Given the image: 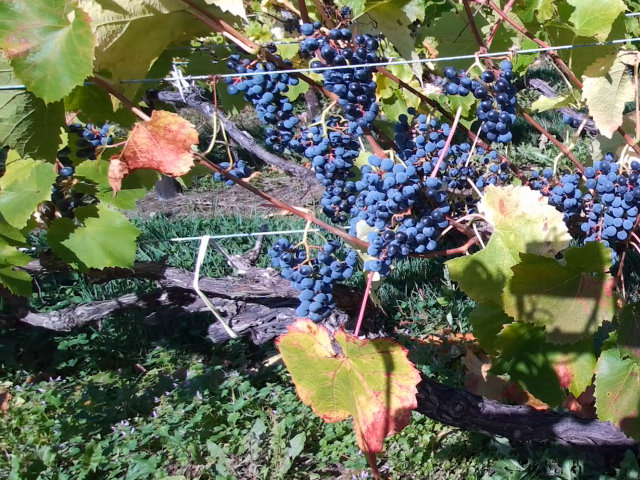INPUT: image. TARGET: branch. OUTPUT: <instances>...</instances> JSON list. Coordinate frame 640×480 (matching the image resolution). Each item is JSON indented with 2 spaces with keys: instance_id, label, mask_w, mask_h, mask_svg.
<instances>
[{
  "instance_id": "obj_1",
  "label": "branch",
  "mask_w": 640,
  "mask_h": 480,
  "mask_svg": "<svg viewBox=\"0 0 640 480\" xmlns=\"http://www.w3.org/2000/svg\"><path fill=\"white\" fill-rule=\"evenodd\" d=\"M191 155L198 161L203 162L204 164L212 167L216 172H222L227 178L233 179L235 181V185H237L239 188L243 189L244 191L256 197H259L260 199H263L267 202H270L274 204L276 207L281 208L285 211H288L289 213H292L307 222L315 223L317 226L327 228L331 234H333L335 237H338L346 241L347 243L358 245L362 248H368L370 246V243L368 241L362 240L361 238L350 236L342 232L341 230L336 229L328 221L319 219L317 216H312L310 214H307L305 211L300 210L295 206H292L288 203L280 201L278 198L270 194H267L266 192L258 190L253 186H250L249 184L245 183L241 179L231 175L229 172L223 169L215 160H212L211 158H208L207 156L200 154L196 149H193L191 151Z\"/></svg>"
},
{
  "instance_id": "obj_2",
  "label": "branch",
  "mask_w": 640,
  "mask_h": 480,
  "mask_svg": "<svg viewBox=\"0 0 640 480\" xmlns=\"http://www.w3.org/2000/svg\"><path fill=\"white\" fill-rule=\"evenodd\" d=\"M187 5L192 10H194L195 12H197V13L201 14L202 16H204L208 21H210L212 23H215L216 25H218L222 29L226 30L229 34H231L234 38L239 40L241 43L247 45L248 47L253 49L255 52H257L258 54L263 56L268 62L273 64L278 69H280V70H288L289 69V66L286 63H283L280 60H278L277 58H275L274 56H272L263 47L259 46L258 44H256L251 39H249V38L245 37L243 34L239 33L230 24H228L227 22H225L221 18H219L217 16H214L213 14H211L204 7L197 5L193 0H188L187 1Z\"/></svg>"
},
{
  "instance_id": "obj_3",
  "label": "branch",
  "mask_w": 640,
  "mask_h": 480,
  "mask_svg": "<svg viewBox=\"0 0 640 480\" xmlns=\"http://www.w3.org/2000/svg\"><path fill=\"white\" fill-rule=\"evenodd\" d=\"M378 71L381 75L389 77L390 79H392L394 82L398 83L403 89L413 92L416 95H418L420 98H422L423 100L426 101V103L428 105H430L431 107L437 109L442 115H444L446 118H449L451 121L455 120V116L440 102H437L436 100H434L432 97L424 94L422 91H420L419 89L409 86L407 85L402 79L398 78L396 75H394L392 72L389 71H385L383 68H378Z\"/></svg>"
},
{
  "instance_id": "obj_4",
  "label": "branch",
  "mask_w": 640,
  "mask_h": 480,
  "mask_svg": "<svg viewBox=\"0 0 640 480\" xmlns=\"http://www.w3.org/2000/svg\"><path fill=\"white\" fill-rule=\"evenodd\" d=\"M515 109L518 111L523 118H525L534 128H536L539 132H541L546 138L550 139L565 155L580 169H584V165L579 162V160L561 143L555 138L552 134H550L547 130H545L540 124H538L533 118L528 115L520 105H516Z\"/></svg>"
},
{
  "instance_id": "obj_5",
  "label": "branch",
  "mask_w": 640,
  "mask_h": 480,
  "mask_svg": "<svg viewBox=\"0 0 640 480\" xmlns=\"http://www.w3.org/2000/svg\"><path fill=\"white\" fill-rule=\"evenodd\" d=\"M93 81L102 86L110 95L119 99L130 111H132L135 115L141 118L143 121H147L149 116L137 108L124 94L114 89L105 79L100 78L99 76H95Z\"/></svg>"
},
{
  "instance_id": "obj_6",
  "label": "branch",
  "mask_w": 640,
  "mask_h": 480,
  "mask_svg": "<svg viewBox=\"0 0 640 480\" xmlns=\"http://www.w3.org/2000/svg\"><path fill=\"white\" fill-rule=\"evenodd\" d=\"M478 243V238L470 235L469 236V241L466 242L463 246L458 247V248H452V249H448L445 251H432L429 253H424V254H418V253H409L408 257L409 258H416V259H433L434 257L437 256H448L450 254H455V253H460L463 251H466L470 246H472L473 244H477Z\"/></svg>"
},
{
  "instance_id": "obj_7",
  "label": "branch",
  "mask_w": 640,
  "mask_h": 480,
  "mask_svg": "<svg viewBox=\"0 0 640 480\" xmlns=\"http://www.w3.org/2000/svg\"><path fill=\"white\" fill-rule=\"evenodd\" d=\"M488 5L495 10V12L503 19L505 20L508 24H510L513 28H515L518 32L522 33L523 35H525L526 37L530 38L531 40H533L535 43L539 44L541 47L543 46H549L548 44H546L543 40L539 39L536 35H533L531 32L527 31L526 29L522 28L520 25H518L514 20H512L509 16H507L506 14H504V12L500 9L499 6H497L493 0H488Z\"/></svg>"
},
{
  "instance_id": "obj_8",
  "label": "branch",
  "mask_w": 640,
  "mask_h": 480,
  "mask_svg": "<svg viewBox=\"0 0 640 480\" xmlns=\"http://www.w3.org/2000/svg\"><path fill=\"white\" fill-rule=\"evenodd\" d=\"M297 77L303 82L307 83L313 90L318 92L322 97L328 98L333 102H337L339 100V97L336 94H334L331 91L325 90L322 86H320L318 83H316L312 78H310L306 74L298 73Z\"/></svg>"
},
{
  "instance_id": "obj_9",
  "label": "branch",
  "mask_w": 640,
  "mask_h": 480,
  "mask_svg": "<svg viewBox=\"0 0 640 480\" xmlns=\"http://www.w3.org/2000/svg\"><path fill=\"white\" fill-rule=\"evenodd\" d=\"M464 8H465V12L466 15L469 17L472 27H473V32H474V36H475V41L477 43V46L479 48V50L483 53H489V49L485 48L481 38H480V34H479V30H478V24L477 21L475 19V16L473 15V13L471 12L470 6L468 2L464 3Z\"/></svg>"
},
{
  "instance_id": "obj_10",
  "label": "branch",
  "mask_w": 640,
  "mask_h": 480,
  "mask_svg": "<svg viewBox=\"0 0 640 480\" xmlns=\"http://www.w3.org/2000/svg\"><path fill=\"white\" fill-rule=\"evenodd\" d=\"M550 56L557 62L558 65H561V67L563 68V70L565 71V73L568 75V77L579 87L582 88L583 87V83L571 72L570 68L567 66L566 62L564 61V59L558 55V51L557 50H551L549 51Z\"/></svg>"
},
{
  "instance_id": "obj_11",
  "label": "branch",
  "mask_w": 640,
  "mask_h": 480,
  "mask_svg": "<svg viewBox=\"0 0 640 480\" xmlns=\"http://www.w3.org/2000/svg\"><path fill=\"white\" fill-rule=\"evenodd\" d=\"M457 127L459 128V130L465 134V136L470 140H476L475 142V146L479 147L480 145L486 149L487 151H491L492 147L490 145H488L487 143H485L484 140L482 139H477V134L475 132H473L470 128H468L467 126H465L464 124H462L461 122L457 123Z\"/></svg>"
},
{
  "instance_id": "obj_12",
  "label": "branch",
  "mask_w": 640,
  "mask_h": 480,
  "mask_svg": "<svg viewBox=\"0 0 640 480\" xmlns=\"http://www.w3.org/2000/svg\"><path fill=\"white\" fill-rule=\"evenodd\" d=\"M497 157L507 165V167L516 175V177L520 180L522 184H524L528 189L533 188V185L524 178V176L520 173V171L512 164V162L506 156H504L502 153H498Z\"/></svg>"
},
{
  "instance_id": "obj_13",
  "label": "branch",
  "mask_w": 640,
  "mask_h": 480,
  "mask_svg": "<svg viewBox=\"0 0 640 480\" xmlns=\"http://www.w3.org/2000/svg\"><path fill=\"white\" fill-rule=\"evenodd\" d=\"M364 136L368 140V143L371 145V147H372L373 151L375 152V154L379 158L385 159L387 157V154L384 151L381 150L380 146L376 142L375 138L373 137V135L371 134V131L369 129H366L364 131Z\"/></svg>"
},
{
  "instance_id": "obj_14",
  "label": "branch",
  "mask_w": 640,
  "mask_h": 480,
  "mask_svg": "<svg viewBox=\"0 0 640 480\" xmlns=\"http://www.w3.org/2000/svg\"><path fill=\"white\" fill-rule=\"evenodd\" d=\"M618 132L624 138L625 142L628 143L636 151L637 154H640L639 146L629 138L628 134L625 132V130L622 127L618 128Z\"/></svg>"
},
{
  "instance_id": "obj_15",
  "label": "branch",
  "mask_w": 640,
  "mask_h": 480,
  "mask_svg": "<svg viewBox=\"0 0 640 480\" xmlns=\"http://www.w3.org/2000/svg\"><path fill=\"white\" fill-rule=\"evenodd\" d=\"M299 9H300V12H301V14H302V16H303V20H304L305 22H309V21H310V18H309V16H308L307 11H306V7H305L304 0H299Z\"/></svg>"
}]
</instances>
